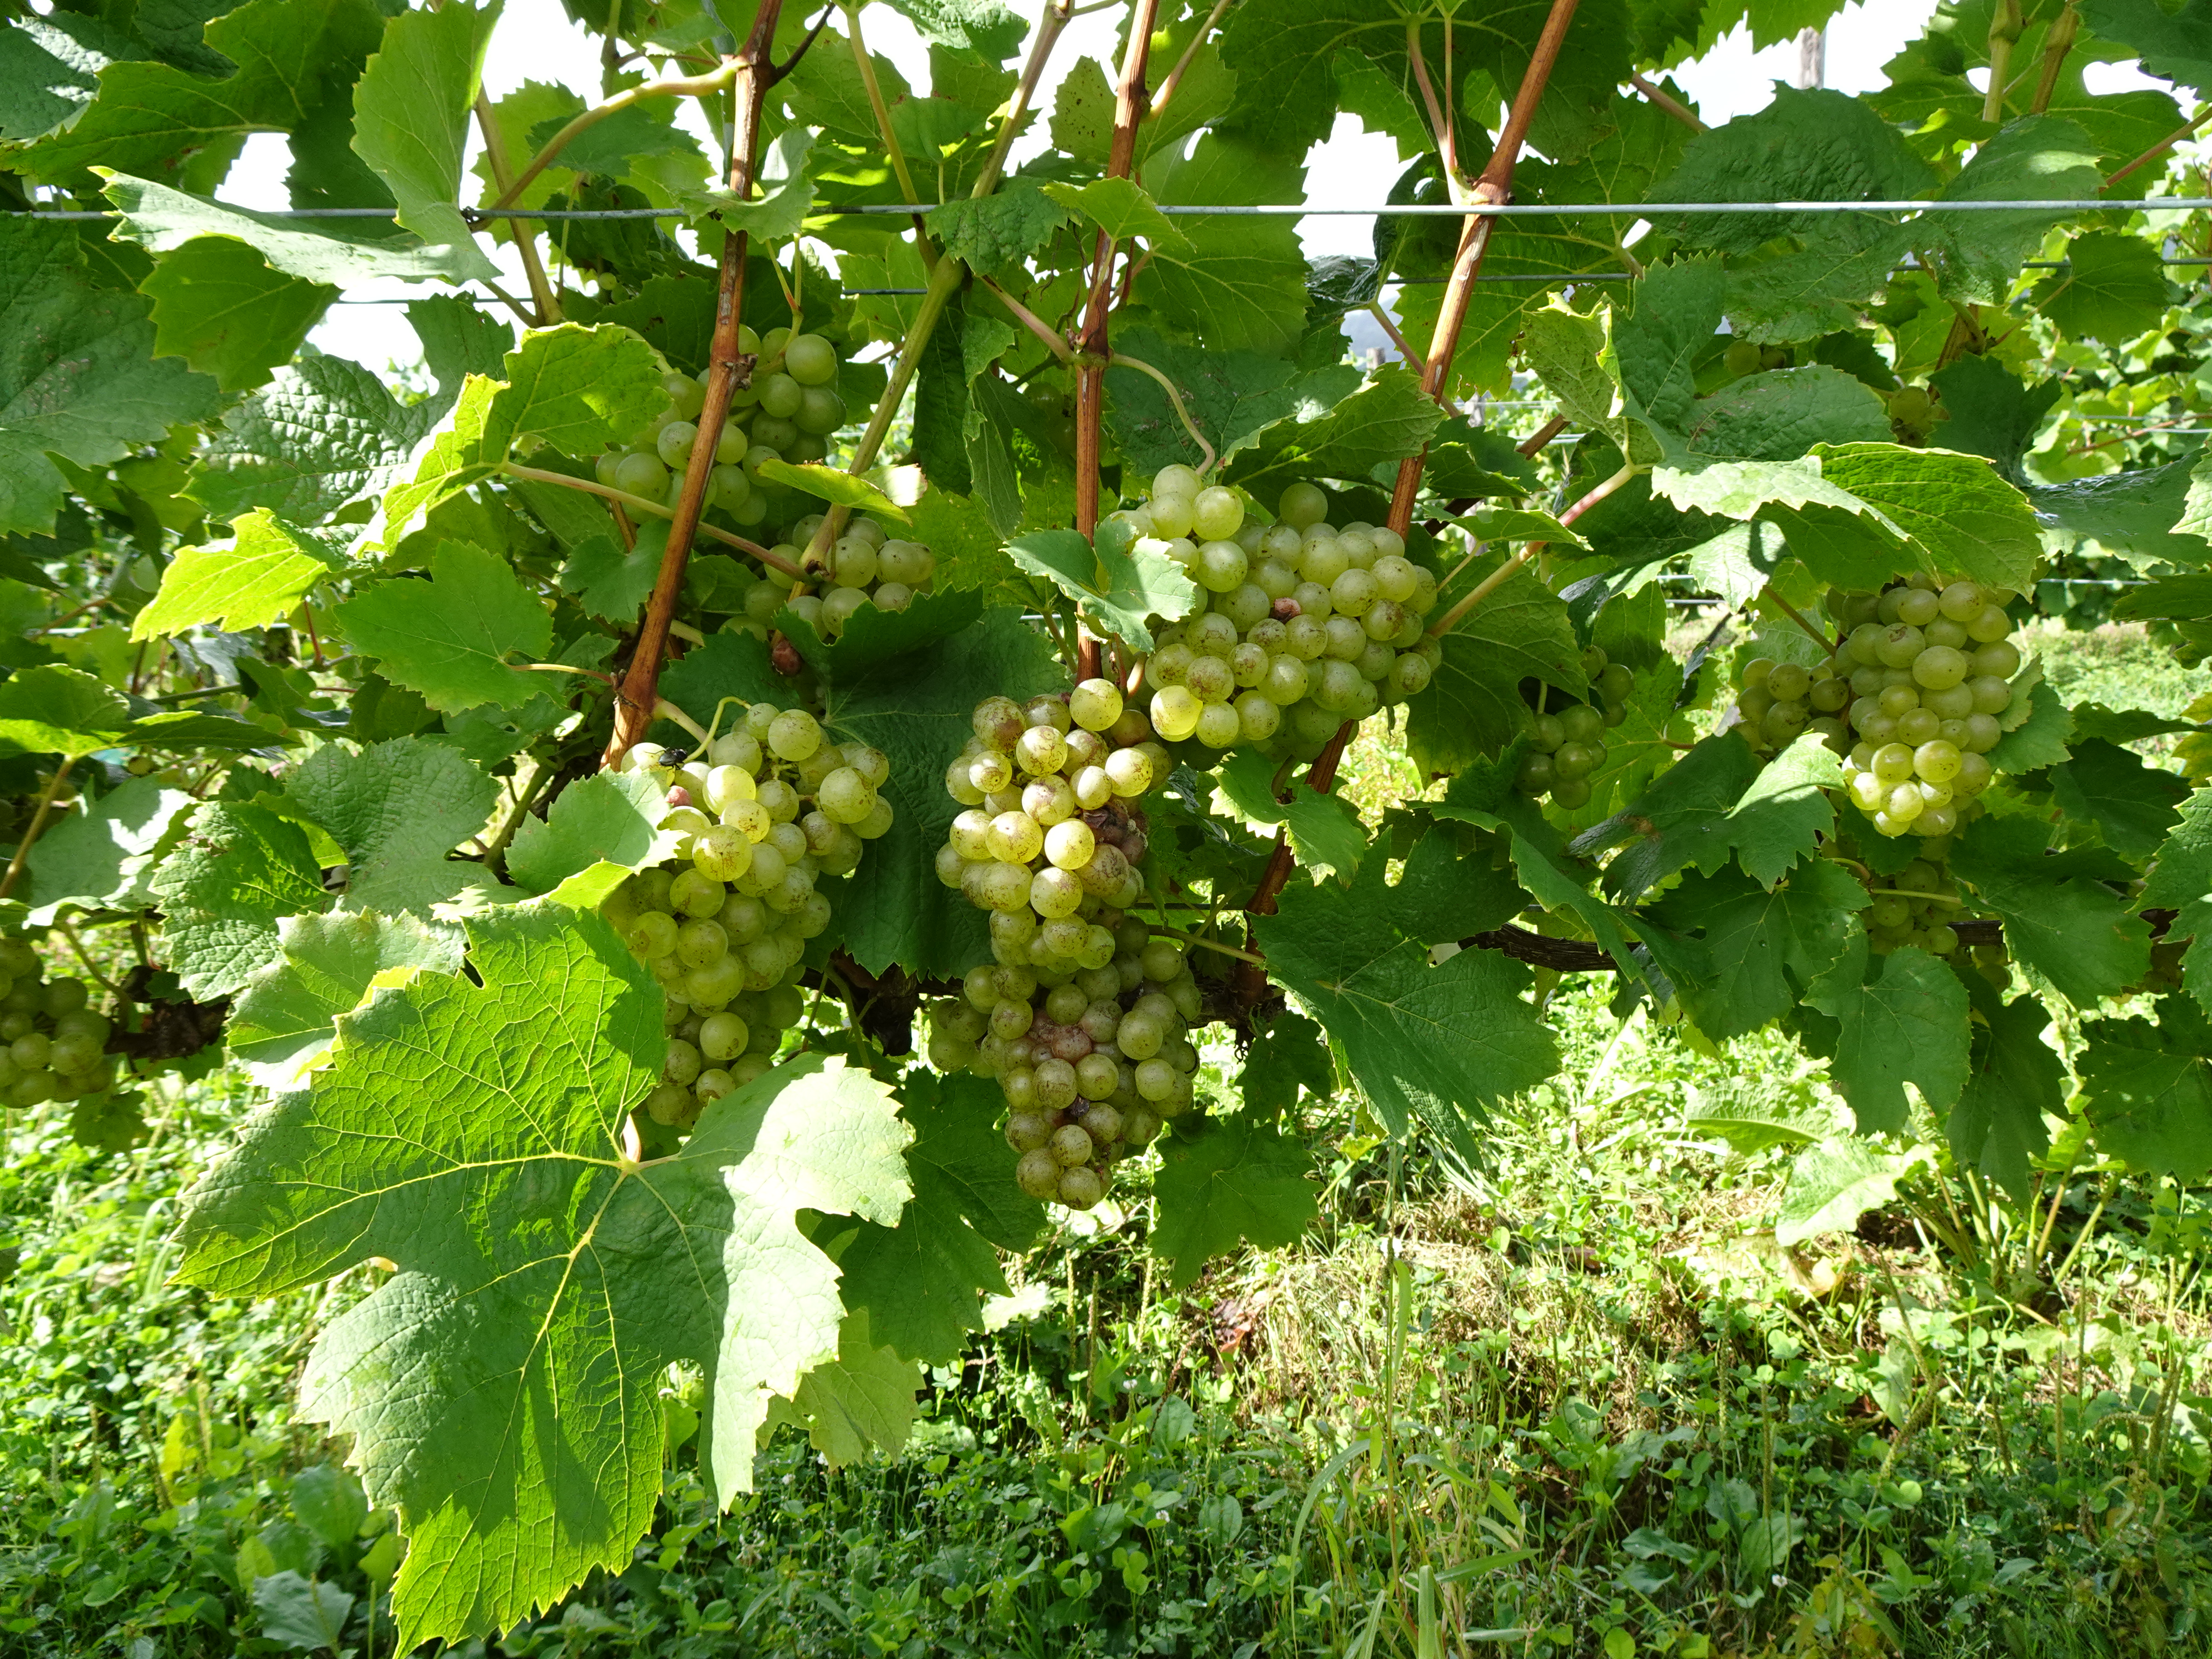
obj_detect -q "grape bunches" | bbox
[1101,463,1442,769]
[1722,339,1789,375]
[599,704,894,1132]
[1826,570,2020,838]
[1887,385,1949,432]
[596,324,847,524]
[1820,818,1972,955]
[1513,645,1634,809]
[1944,938,2014,1025]
[0,936,113,1109]
[717,509,935,641]
[935,678,1174,973]
[1732,656,1848,759]
[928,916,1202,1211]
